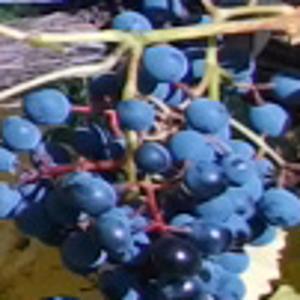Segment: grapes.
<instances>
[{"label":"grapes","mask_w":300,"mask_h":300,"mask_svg":"<svg viewBox=\"0 0 300 300\" xmlns=\"http://www.w3.org/2000/svg\"><path fill=\"white\" fill-rule=\"evenodd\" d=\"M139 9L141 13L128 9L113 16V29L150 30L163 23L185 22L191 16V10L183 0H141Z\"/></svg>","instance_id":"b958b902"},{"label":"grapes","mask_w":300,"mask_h":300,"mask_svg":"<svg viewBox=\"0 0 300 300\" xmlns=\"http://www.w3.org/2000/svg\"><path fill=\"white\" fill-rule=\"evenodd\" d=\"M218 68L225 78L223 87L225 91L233 94H242L250 91L257 75L258 65L251 57H242L237 61L232 58L230 46H218Z\"/></svg>","instance_id":"84f90ec7"},{"label":"grapes","mask_w":300,"mask_h":300,"mask_svg":"<svg viewBox=\"0 0 300 300\" xmlns=\"http://www.w3.org/2000/svg\"><path fill=\"white\" fill-rule=\"evenodd\" d=\"M269 96L285 103H295L300 100V72L296 70H275L266 78Z\"/></svg>","instance_id":"f8a65327"},{"label":"grapes","mask_w":300,"mask_h":300,"mask_svg":"<svg viewBox=\"0 0 300 300\" xmlns=\"http://www.w3.org/2000/svg\"><path fill=\"white\" fill-rule=\"evenodd\" d=\"M252 129L259 135L276 139L293 129V116L287 106L275 101L252 102L246 108Z\"/></svg>","instance_id":"0513c4c2"},{"label":"grapes","mask_w":300,"mask_h":300,"mask_svg":"<svg viewBox=\"0 0 300 300\" xmlns=\"http://www.w3.org/2000/svg\"><path fill=\"white\" fill-rule=\"evenodd\" d=\"M200 42L143 50L140 98L122 96L108 127L74 129L66 149L43 127L71 124L60 86L27 90L24 116L1 122L0 219L56 247L71 273L111 300H243L250 266L276 228H300V190L275 188L276 167L233 138L226 106L193 85ZM19 153L27 152V156L31 160V162L34 166H22L18 168L20 165V155Z\"/></svg>","instance_id":"01657485"},{"label":"grapes","mask_w":300,"mask_h":300,"mask_svg":"<svg viewBox=\"0 0 300 300\" xmlns=\"http://www.w3.org/2000/svg\"><path fill=\"white\" fill-rule=\"evenodd\" d=\"M119 88V76L113 70L103 71L91 78L89 92L96 99L115 95Z\"/></svg>","instance_id":"5460f4e3"}]
</instances>
